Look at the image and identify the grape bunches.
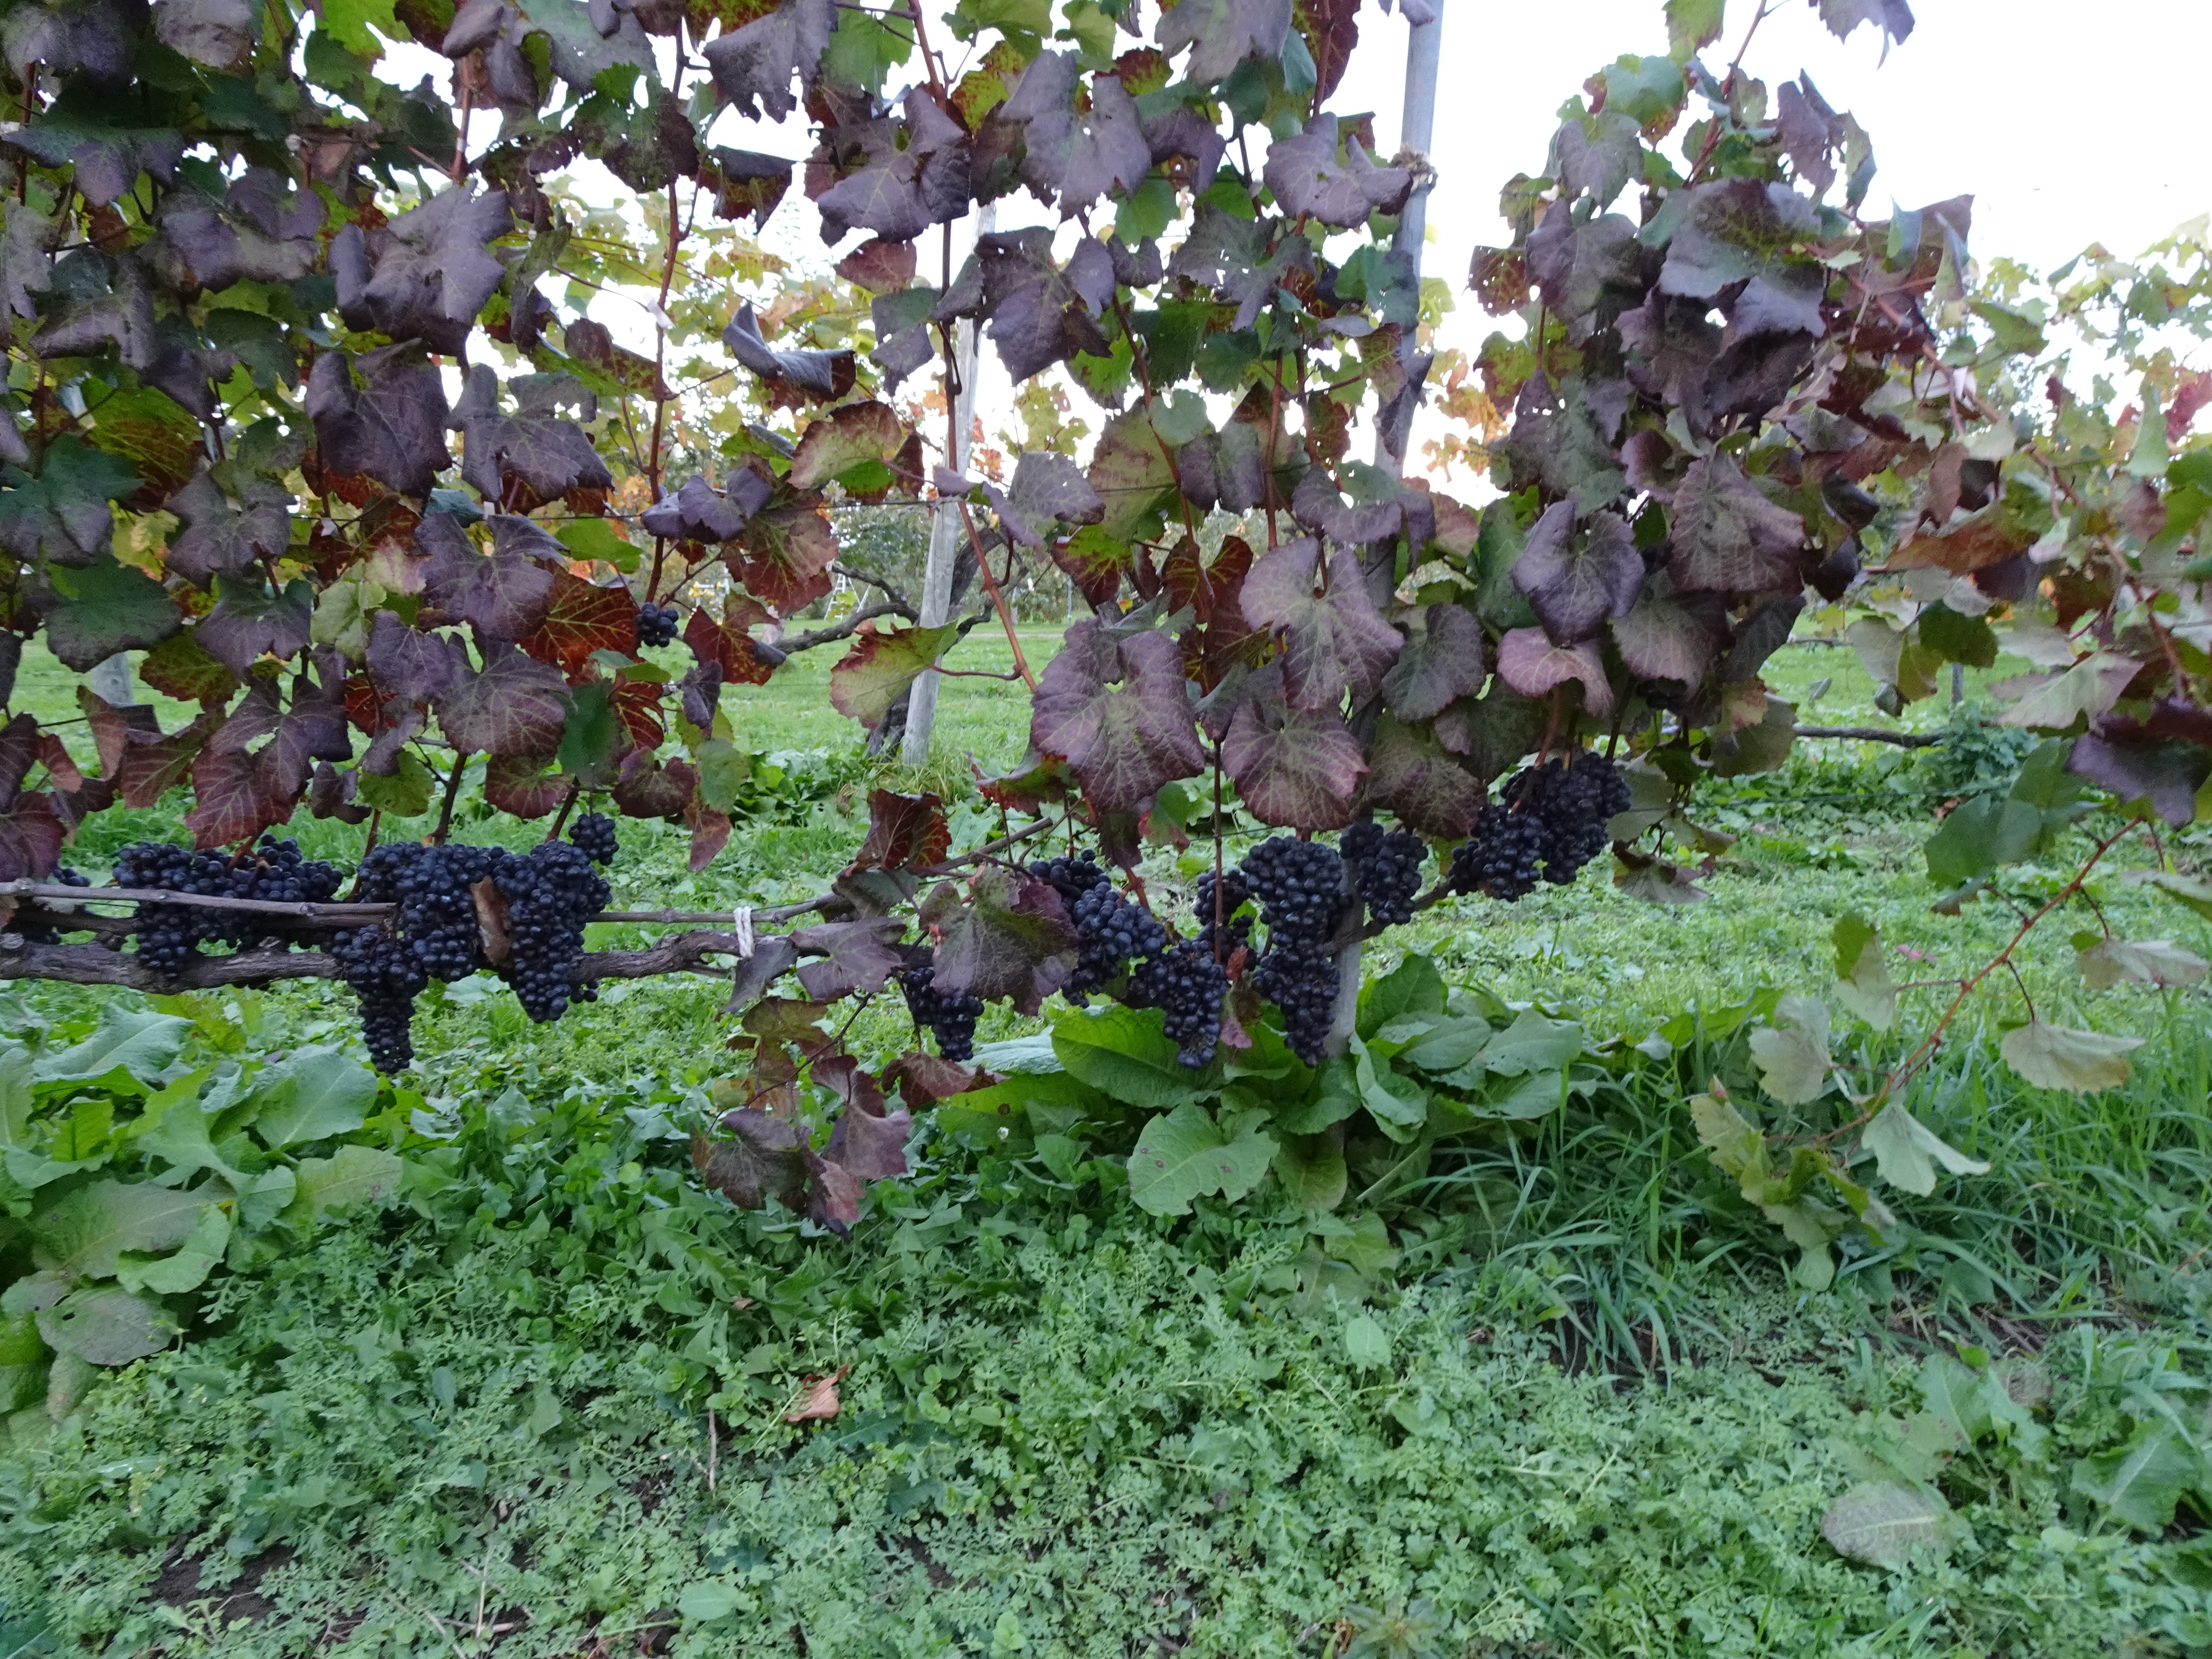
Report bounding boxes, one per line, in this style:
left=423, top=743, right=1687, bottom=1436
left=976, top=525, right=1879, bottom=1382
left=1242, top=943, right=1341, bottom=1068
left=1632, top=672, right=1685, bottom=716
left=1074, top=882, right=1165, bottom=1002
left=828, top=903, right=872, bottom=933
left=1188, top=865, right=1260, bottom=970
left=565, top=810, right=624, bottom=867
left=1138, top=941, right=1229, bottom=1072
left=111, top=839, right=227, bottom=898
left=228, top=833, right=346, bottom=950
left=316, top=926, right=426, bottom=1078
left=1235, top=834, right=1354, bottom=954
left=354, top=837, right=434, bottom=907
left=138, top=905, right=195, bottom=986
left=1336, top=819, right=1433, bottom=934
left=1542, top=740, right=1635, bottom=887
left=389, top=844, right=502, bottom=986
left=631, top=599, right=682, bottom=656
left=1028, top=850, right=1117, bottom=1014
left=502, top=840, right=618, bottom=1025
left=199, top=907, right=275, bottom=996
left=1442, top=802, right=1549, bottom=905
left=900, top=962, right=983, bottom=1065
left=47, top=863, right=124, bottom=951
